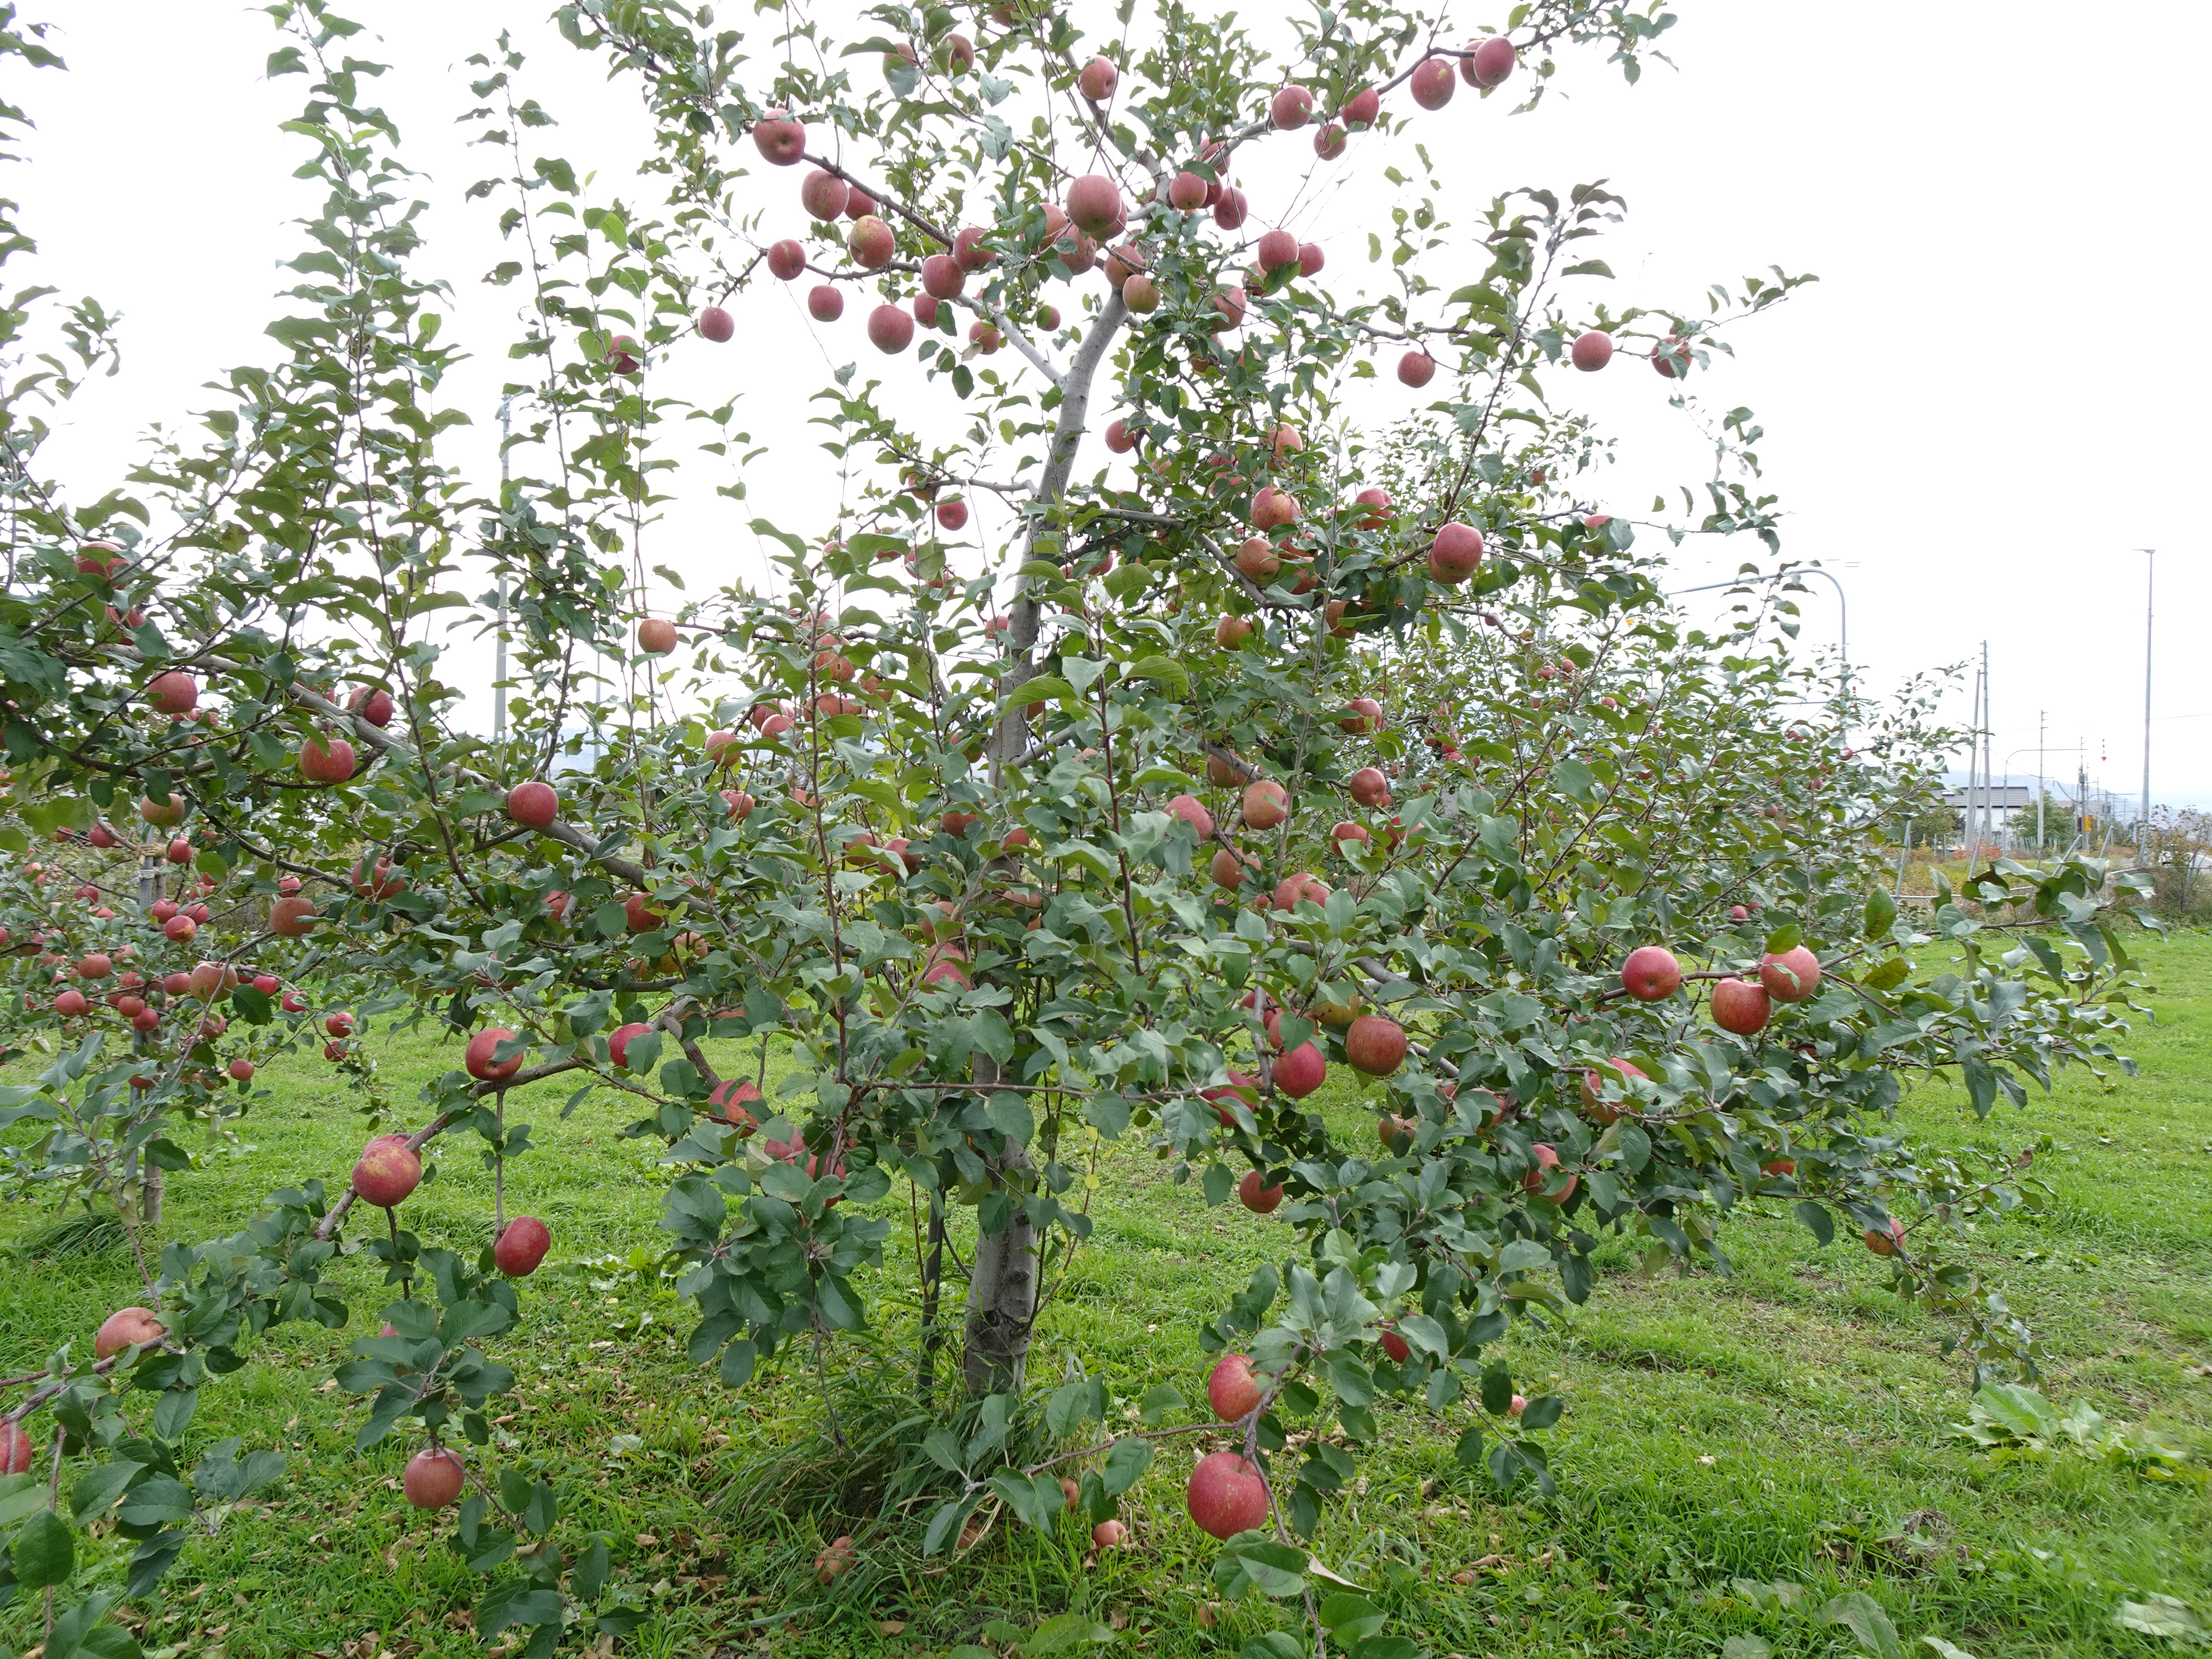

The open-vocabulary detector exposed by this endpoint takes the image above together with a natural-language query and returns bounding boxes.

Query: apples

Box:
[852,671,893,709]
[1583,515,1619,554]
[984,615,1010,644]
[139,792,186,830]
[1669,772,1686,788]
[1023,203,1069,254]
[1104,418,1137,454]
[1379,1111,1415,1149]
[1426,1077,1462,1107]
[1196,1601,1235,1630]
[1340,85,1379,133]
[1562,1015,1602,1047]
[76,952,111,980]
[189,959,240,1001]
[142,978,168,993]
[199,867,231,886]
[1206,449,1241,497]
[1816,760,1837,778]
[914,291,948,331]
[1596,877,1611,895]
[88,823,121,849]
[1710,976,1772,1036]
[1235,536,1280,585]
[867,990,898,1020]
[920,962,973,1008]
[697,304,734,344]
[1145,459,1177,486]
[1297,703,1318,718]
[879,835,923,884]
[1141,190,1174,220]
[953,225,997,274]
[1433,521,1483,575]
[1422,733,1460,754]
[991,825,1032,861]
[823,539,858,570]
[988,0,1029,28]
[1621,944,1682,1002]
[46,821,74,845]
[871,525,903,562]
[1258,228,1296,275]
[120,972,148,995]
[1238,1064,1275,1105]
[1581,752,1595,769]
[299,738,355,786]
[608,1022,657,1072]
[848,216,894,269]
[1245,259,1282,298]
[1335,696,1383,737]
[1066,748,1110,783]
[1325,598,1361,640]
[1208,1353,1273,1427]
[1169,171,1207,211]
[363,1135,421,1175]
[1257,418,1303,472]
[1500,1393,1529,1419]
[1165,586,1201,614]
[285,670,335,718]
[377,1313,436,1376]
[107,984,128,1010]
[1293,241,1326,278]
[624,954,653,979]
[1522,696,1542,709]
[1215,613,1266,652]
[1434,697,1465,721]
[1762,801,1780,817]
[1189,333,1223,376]
[1362,585,1396,617]
[1395,664,1417,683]
[637,618,678,657]
[1754,1145,1795,1181]
[1314,125,1347,161]
[1323,507,1347,529]
[162,972,197,995]
[196,1011,228,1040]
[1270,1038,1328,1100]
[1736,895,1765,911]
[801,692,842,732]
[1454,1569,1482,1591]
[171,708,189,730]
[195,816,219,833]
[968,322,1001,356]
[814,634,850,661]
[1039,305,1063,333]
[1505,713,1528,731]
[1270,84,1313,132]
[1126,549,1145,568]
[801,169,849,223]
[1353,488,1394,531]
[1160,794,1217,848]
[524,886,573,927]
[1378,791,1398,815]
[99,606,151,649]
[921,254,968,300]
[1516,1142,1580,1209]
[1836,747,1854,762]
[1058,567,1089,600]
[0,697,26,749]
[182,1070,218,1104]
[782,1151,845,1210]
[718,789,756,820]
[1530,763,1548,776]
[165,913,197,945]
[1110,489,1136,512]
[1459,42,1495,90]
[1652,335,1694,378]
[464,1025,525,1082]
[1275,534,1324,562]
[903,542,935,580]
[269,898,316,939]
[73,541,133,591]
[1554,697,1579,717]
[1307,979,1360,1029]
[1211,845,1264,897]
[1465,753,1483,767]
[973,288,1000,319]
[277,874,301,899]
[821,1132,860,1165]
[1061,600,1093,628]
[24,990,47,1010]
[1783,1020,1827,1064]
[1582,1055,1653,1126]
[1227,345,1264,381]
[1349,767,1387,805]
[55,991,88,1019]
[41,925,65,950]
[1521,468,1549,488]
[760,713,797,751]
[492,1215,552,1279]
[1176,721,1199,734]
[1419,778,1442,802]
[794,787,821,814]
[229,1058,255,1081]
[324,1041,348,1064]
[940,797,990,839]
[1328,822,1372,859]
[1226,523,1251,547]
[1784,727,1803,746]
[842,831,883,867]
[191,826,220,852]
[325,1009,356,1040]
[708,1078,766,1138]
[1636,696,1661,711]
[1344,1015,1407,1076]
[113,941,142,968]
[1796,775,1821,794]
[95,1307,166,1374]
[1534,668,1555,684]
[806,284,844,323]
[763,1123,818,1173]
[352,1144,423,1208]
[907,465,941,500]
[198,711,226,727]
[106,1378,127,1396]
[150,897,179,925]
[751,108,806,167]
[403,1447,466,1510]
[600,335,641,377]
[1197,282,1246,333]
[936,495,968,531]
[133,1007,162,1033]
[180,902,210,926]
[1381,1309,1439,1366]
[350,853,407,905]
[885,41,919,72]
[127,1060,160,1089]
[1409,57,1456,111]
[282,991,312,1020]
[1206,742,1254,789]
[347,685,394,729]
[0,921,11,952]
[1636,761,1656,781]
[811,652,855,685]
[0,770,15,788]
[842,184,875,220]
[168,839,194,865]
[1250,485,1301,537]
[16,930,45,958]
[1123,228,1155,260]
[663,997,707,1031]
[1516,626,1534,647]
[1154,521,1187,544]
[837,696,869,735]
[940,35,975,74]
[70,886,101,908]
[1722,904,1748,928]
[766,237,806,281]
[47,862,66,880]
[1772,776,1789,794]
[1694,1037,1737,1076]
[0,1413,34,1484]
[1122,275,1161,316]
[1267,1010,1319,1054]
[1055,222,1097,276]
[163,996,179,1014]
[948,728,986,766]
[1461,1086,1506,1136]
[923,948,967,977]
[1105,524,1127,552]
[1473,37,1514,86]
[1076,547,1114,575]
[925,572,956,602]
[1562,730,1584,746]
[1429,542,1475,586]
[1398,351,1435,389]
[753,699,788,740]
[149,672,198,714]
[1077,53,1117,101]
[1862,1217,1905,1256]
[94,907,119,923]
[922,900,965,944]
[1484,612,1501,628]
[1104,246,1144,290]
[44,971,67,991]
[1757,939,1822,1003]
[1444,749,1466,767]
[1067,174,1122,233]
[1584,992,1616,1023]
[1238,1167,1286,1216]
[1600,694,1616,715]
[1278,560,1319,597]
[1195,137,1233,179]
[999,888,1042,920]
[1570,330,1612,371]
[786,606,806,626]
[947,1119,981,1156]
[1024,913,1058,939]
[866,303,914,356]
[1543,808,1563,827]
[710,994,755,1032]
[1021,686,1047,722]
[680,870,717,907]
[670,932,709,965]
[1384,765,1407,780]
[1273,871,1331,930]
[651,945,681,973]
[1414,679,1433,695]
[20,862,43,879]
[251,974,278,996]
[1555,656,1575,672]
[1199,1067,1259,1128]
[1382,816,1429,861]
[1214,185,1248,232]
[705,730,742,768]
[1237,987,1290,1032]
[1187,1451,1270,1542]
[625,891,664,937]
[508,780,560,828]
[804,609,838,634]
[182,735,205,750]
[1240,779,1292,831]
[1652,725,1665,738]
